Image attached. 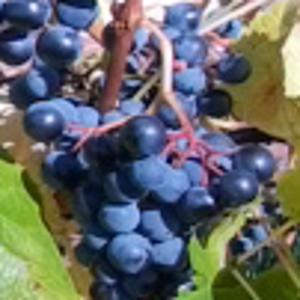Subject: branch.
Instances as JSON below:
<instances>
[{
  "label": "branch",
  "instance_id": "obj_1",
  "mask_svg": "<svg viewBox=\"0 0 300 300\" xmlns=\"http://www.w3.org/2000/svg\"><path fill=\"white\" fill-rule=\"evenodd\" d=\"M118 11L113 32V52L109 64V74L99 98V109L111 112L118 104L124 80L129 42L139 25L142 0H114Z\"/></svg>",
  "mask_w": 300,
  "mask_h": 300
}]
</instances>
